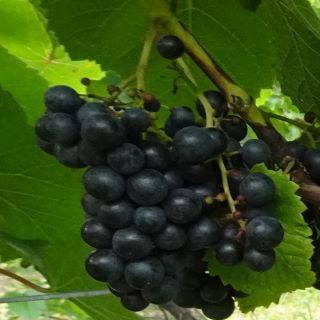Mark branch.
Segmentation results:
<instances>
[{"mask_svg":"<svg viewBox=\"0 0 320 320\" xmlns=\"http://www.w3.org/2000/svg\"><path fill=\"white\" fill-rule=\"evenodd\" d=\"M145 5L151 24L162 23L171 35L180 38L189 54L205 74L224 94L229 111L240 116L254 130L259 140L266 143L274 155L283 175H290V182L299 185L311 204L320 210V186L310 178L309 171L291 156L288 141L275 129L271 120L257 107L255 98L235 84L220 68L211 55L201 46L188 28L170 9V0H137Z\"/></svg>","mask_w":320,"mask_h":320,"instance_id":"obj_1","label":"branch"}]
</instances>
